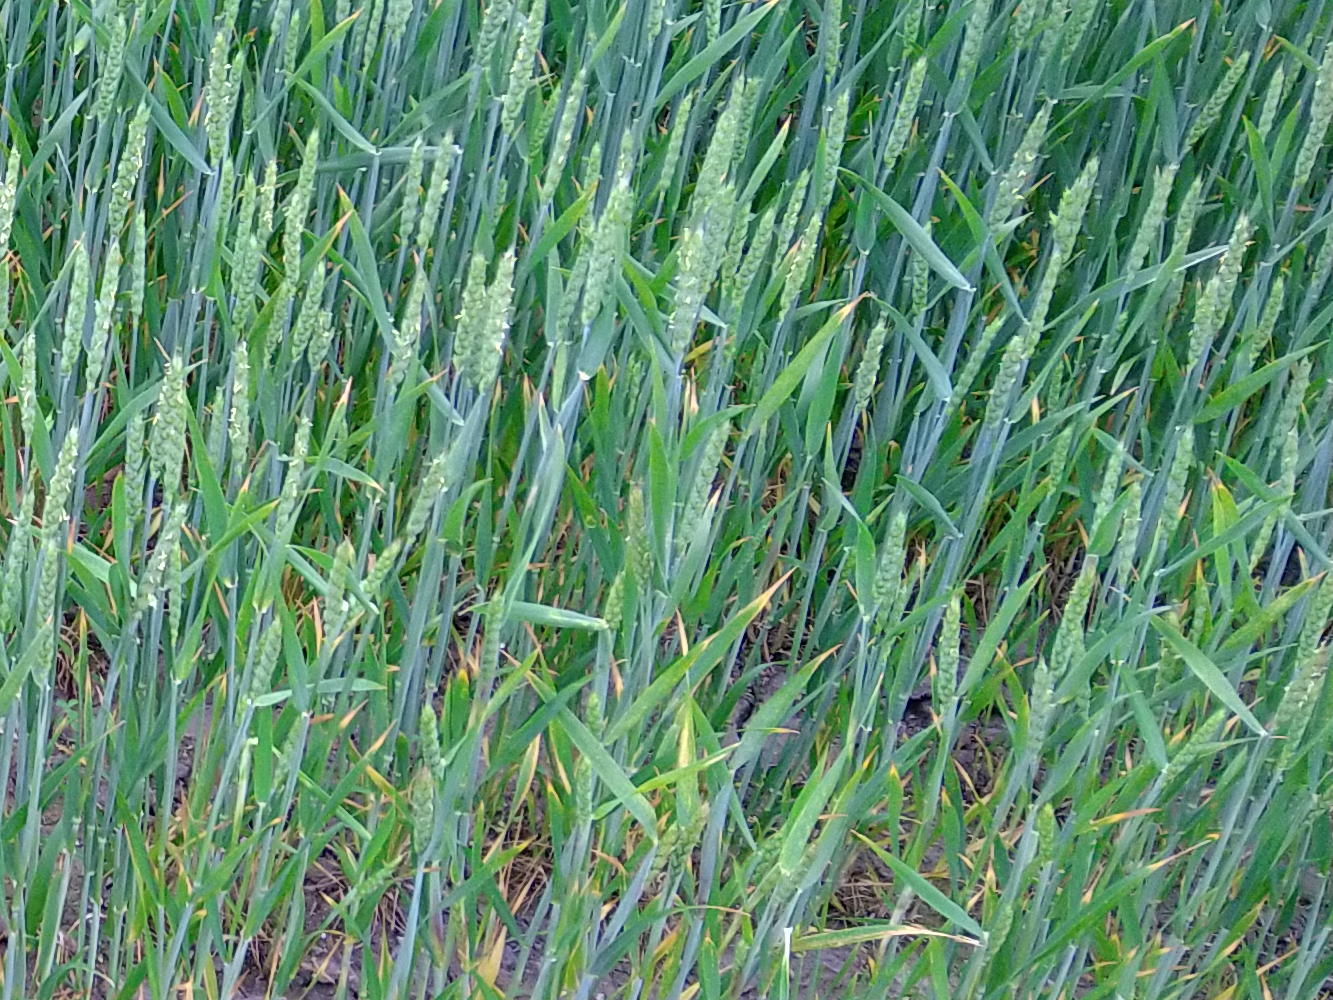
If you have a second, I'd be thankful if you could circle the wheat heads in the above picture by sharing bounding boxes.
[937,597,962,711]
[903,0,933,55]
[527,88,562,157]
[1060,0,1108,59]
[628,487,653,588]
[733,80,762,170]
[224,53,245,131]
[480,591,506,690]
[221,0,254,36]
[390,272,428,387]
[43,428,80,542]
[0,495,35,630]
[775,174,809,265]
[823,0,844,76]
[1187,281,1217,366]
[250,618,283,702]
[720,203,754,295]
[400,138,424,242]
[274,714,307,789]
[574,694,603,741]
[1092,446,1127,534]
[1307,785,1332,820]
[1027,0,1060,38]
[1013,0,1049,42]
[1158,429,1195,541]
[336,0,353,22]
[59,245,90,373]
[1046,365,1063,417]
[1307,226,1333,298]
[674,423,731,555]
[648,0,675,34]
[35,542,60,676]
[366,0,383,68]
[1250,511,1277,566]
[988,109,1051,234]
[1191,588,1206,655]
[205,35,228,159]
[217,160,234,239]
[21,334,35,442]
[870,512,908,619]
[669,805,709,877]
[1295,45,1333,183]
[353,0,375,61]
[126,413,145,525]
[1283,35,1310,101]
[232,176,257,289]
[885,59,929,167]
[687,107,740,228]
[874,586,895,635]
[98,17,128,118]
[579,142,602,234]
[699,188,738,280]
[1278,671,1328,765]
[1052,157,1100,255]
[542,72,588,197]
[108,104,152,234]
[419,135,455,248]
[479,252,517,387]
[1297,571,1333,668]
[0,181,7,304]
[659,94,693,190]
[1154,615,1183,697]
[775,844,815,902]
[208,389,225,471]
[958,0,1003,80]
[1161,178,1204,314]
[986,336,1027,430]
[131,505,190,612]
[1251,278,1286,354]
[555,239,592,336]
[292,264,327,357]
[855,323,887,406]
[1165,712,1227,781]
[390,0,420,34]
[896,568,921,632]
[1259,66,1284,138]
[310,309,334,372]
[258,160,277,241]
[949,317,1004,409]
[982,903,1013,976]
[1098,312,1129,362]
[1186,54,1250,147]
[612,128,636,202]
[1049,428,1073,491]
[474,0,521,66]
[645,821,674,883]
[706,0,727,42]
[1268,360,1312,454]
[150,412,168,476]
[229,343,250,471]
[1048,569,1096,685]
[1039,0,1080,58]
[1114,484,1143,583]
[264,285,292,360]
[346,541,403,628]
[0,151,19,241]
[404,458,447,540]
[1021,252,1063,357]
[1125,168,1177,277]
[412,768,434,853]
[168,546,183,643]
[419,703,443,784]
[324,542,353,638]
[667,210,709,351]
[357,861,402,905]
[1279,433,1299,513]
[161,357,188,502]
[130,211,148,314]
[271,0,309,35]
[86,242,123,387]
[604,572,625,630]
[818,92,850,210]
[582,184,631,323]
[284,195,304,293]
[780,216,821,312]
[1027,660,1053,755]
[295,131,320,222]
[576,757,593,829]
[1037,805,1056,874]
[282,11,300,71]
[912,226,930,311]
[727,210,776,338]
[1268,649,1331,733]
[1209,218,1251,335]
[502,0,550,130]
[748,829,785,887]
[233,240,261,330]
[276,419,312,537]
[452,255,488,366]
